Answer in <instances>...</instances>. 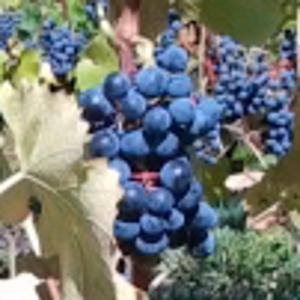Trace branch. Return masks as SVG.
<instances>
[{"label":"branch","instance_id":"30e6481e","mask_svg":"<svg viewBox=\"0 0 300 300\" xmlns=\"http://www.w3.org/2000/svg\"><path fill=\"white\" fill-rule=\"evenodd\" d=\"M141 3L139 0H121L117 10L116 46L120 71L134 75L138 71L135 57L137 42L134 37L140 28Z\"/></svg>","mask_w":300,"mask_h":300}]
</instances>
